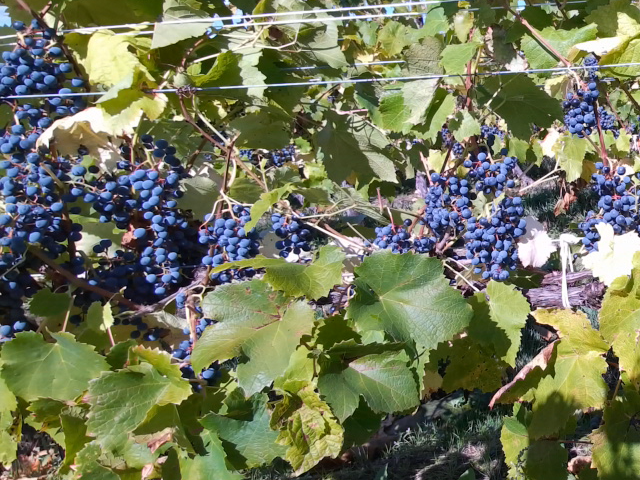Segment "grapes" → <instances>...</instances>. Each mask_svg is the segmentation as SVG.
Segmentation results:
<instances>
[{
    "mask_svg": "<svg viewBox=\"0 0 640 480\" xmlns=\"http://www.w3.org/2000/svg\"><path fill=\"white\" fill-rule=\"evenodd\" d=\"M46 105L41 104L39 108H34L31 103L22 104L17 107L15 116L18 119H28L31 127H38L35 132H31L27 137L21 138L26 133V129L22 124H12L9 128L10 134H6V129L2 128L0 132V152L11 154L10 160L0 162V169L6 170V175L0 178V191H3L5 202V211L8 214L0 216V246L10 247L14 253H5L0 259V337H11L15 332L32 331L37 332L39 326L29 322L25 316V310L22 306L21 298L23 295L30 299L42 286L28 273H20L19 275L8 269L16 266L26 251V242H40L49 251L47 256L53 260L58 258V254H63L66 247L63 244L67 237L72 242H79L82 234L79 233L83 229L80 223H72V232L68 230V223L62 221L60 215L64 210V204L76 202L79 197L83 203H92V207L100 215L99 222L106 224L112 219L115 220L118 230L128 228L130 215L127 212H116L115 202L111 201L113 194L122 195L118 199L119 205H124L127 210L137 209L144 211L142 218L150 220V229L157 236L152 242V246L157 248L154 250L151 246H145L139 253V259L136 264L120 265L110 270H105L103 265L95 268L97 277L90 278L87 282L96 284L109 291L119 292L127 285L124 290V296L138 305H150L163 297L168 296V292L163 285L179 284L182 281L180 272L181 264L177 260L179 257V249H191L193 242L189 239H183L185 233L187 236L196 234V229L189 226V222L181 217H176L173 210L166 208H175L178 205L176 200H164L160 204V195L167 189H175L179 180L191 179L192 175L185 172V167L180 165V160L173 154L176 153L175 147H167L168 142L165 139L152 143L154 137L151 134H143L141 141L146 149L153 151L156 158H162L171 168V173L166 176L163 183L155 181L160 176L157 169L138 168L133 174L125 175H107L106 183L103 181L85 180L76 178L75 185L70 188V193L60 196L56 191L55 179L49 172L43 169L40 164L41 155L30 152V148L36 147V141L43 136L42 129H48L54 123L50 117H42V112ZM25 176L21 179L22 183H17L18 176ZM136 191L137 200L131 199L130 187ZM36 196L37 204L49 205L48 209L42 206L32 204H19L18 202L27 201L29 198ZM160 204L161 214H154L153 208ZM11 213H17L20 217L15 221V227L4 226L13 222ZM169 226L176 227L172 237H168ZM168 259V274H161L163 269L155 267L163 265ZM146 272L144 276L132 278L128 283V279L122 276L134 272Z\"/></svg>",
    "mask_w": 640,
    "mask_h": 480,
    "instance_id": "01657485",
    "label": "grapes"
},
{
    "mask_svg": "<svg viewBox=\"0 0 640 480\" xmlns=\"http://www.w3.org/2000/svg\"><path fill=\"white\" fill-rule=\"evenodd\" d=\"M448 192L455 196H461L454 201V205L460 211V215L456 210L448 211L443 208V204L448 203L451 200V196L444 192L442 185L431 186L429 188V195L424 199V203L427 206L426 213L419 220L421 225L427 226L433 231L435 236H423L421 239L415 238L413 243L409 239L411 234L405 229L398 228L396 233L398 235L391 234L393 227L387 225L384 227H376L374 229V235L376 239H368L363 241L365 247H371V245L377 246L379 249L391 248L393 253L403 254L407 251L414 250L415 252L422 253L428 252L432 248V244L436 245L439 240H442L450 227H456L458 231H463L466 221V232L463 234V238L466 240L464 247L466 248L465 255L470 261L472 266L485 264V271L481 267H476L474 272L480 274L482 279H498L499 281H506L509 278L510 272L507 269L500 268L505 264H508V268L511 271H515L518 268V264L515 262L518 259L519 250L514 248L511 255H508V251L513 245V239L527 234L526 221L518 219L524 215V208L522 207L521 197H504L500 200V208L490 220L481 217L478 220V224L482 229H478L476 224L477 219L471 216V211L467 207L470 203V199L467 197L470 187L469 181L465 178L460 180L457 177H450L448 179Z\"/></svg>",
    "mask_w": 640,
    "mask_h": 480,
    "instance_id": "b958b902",
    "label": "grapes"
},
{
    "mask_svg": "<svg viewBox=\"0 0 640 480\" xmlns=\"http://www.w3.org/2000/svg\"><path fill=\"white\" fill-rule=\"evenodd\" d=\"M594 168L601 170L602 174L593 173L591 175L596 184L590 187V191L597 193L600 197L598 208L603 212V217L594 219L596 212L589 210L584 222L577 224V229L585 234L582 237V244L590 253L598 251V241L600 240V234L591 231L592 225L603 222L610 223L616 235L635 230L636 235L640 237V207L636 209V212L633 210L635 198L626 191L627 185L631 183V178L624 176L622 182H619L618 176H623L626 173V168L624 166L618 167L616 169L618 176H614L611 181H606L604 176L610 173V168L607 165H604L603 162H596Z\"/></svg>",
    "mask_w": 640,
    "mask_h": 480,
    "instance_id": "0513c4c2",
    "label": "grapes"
},
{
    "mask_svg": "<svg viewBox=\"0 0 640 480\" xmlns=\"http://www.w3.org/2000/svg\"><path fill=\"white\" fill-rule=\"evenodd\" d=\"M0 63V95L25 96L44 93L76 92L86 80L74 77L71 87H64L65 74L74 70L71 63H45L41 58L28 55L26 49L3 51Z\"/></svg>",
    "mask_w": 640,
    "mask_h": 480,
    "instance_id": "84f90ec7",
    "label": "grapes"
},
{
    "mask_svg": "<svg viewBox=\"0 0 640 480\" xmlns=\"http://www.w3.org/2000/svg\"><path fill=\"white\" fill-rule=\"evenodd\" d=\"M234 214H238L240 220H233L231 217H212L208 212L203 217V221L211 218L207 230L199 228L197 230L198 243L207 245L214 243L218 247H223L231 261H240L248 257L254 258L259 255V233L254 227H250L248 233L244 229L245 224L251 220L250 208L243 205L234 204L232 208Z\"/></svg>",
    "mask_w": 640,
    "mask_h": 480,
    "instance_id": "f8a65327",
    "label": "grapes"
},
{
    "mask_svg": "<svg viewBox=\"0 0 640 480\" xmlns=\"http://www.w3.org/2000/svg\"><path fill=\"white\" fill-rule=\"evenodd\" d=\"M488 153L480 151L476 156L469 155L467 160L463 161L465 168H472L469 171L471 179L479 178L476 183V190L481 191L484 195L492 193L493 187L497 189L494 193L498 197L504 192V182L507 179L508 169H514L518 158L516 156L503 157L502 163L496 162L493 165L487 160ZM506 187L513 188L515 182L507 180Z\"/></svg>",
    "mask_w": 640,
    "mask_h": 480,
    "instance_id": "5460f4e3",
    "label": "grapes"
},
{
    "mask_svg": "<svg viewBox=\"0 0 640 480\" xmlns=\"http://www.w3.org/2000/svg\"><path fill=\"white\" fill-rule=\"evenodd\" d=\"M291 219L290 224L285 225V216L281 213L271 214L273 223L270 224V228L274 230V235L278 239H283L274 242V248L281 250L279 256L282 258H288L291 251L295 255H300L301 250L309 251L312 240L324 236L322 231L301 223L295 214L291 215Z\"/></svg>",
    "mask_w": 640,
    "mask_h": 480,
    "instance_id": "83cd7487",
    "label": "grapes"
},
{
    "mask_svg": "<svg viewBox=\"0 0 640 480\" xmlns=\"http://www.w3.org/2000/svg\"><path fill=\"white\" fill-rule=\"evenodd\" d=\"M587 89H578L577 95L583 97V101L579 99H573L574 93L567 92L562 105L566 108L573 106L575 109L568 110L566 116L569 118V131L571 134H577L579 138H583L585 135L592 134V128L595 126V120L593 119L592 102L597 100L599 96V90L597 89V83L595 81H589L587 83Z\"/></svg>",
    "mask_w": 640,
    "mask_h": 480,
    "instance_id": "e5b3c951",
    "label": "grapes"
},
{
    "mask_svg": "<svg viewBox=\"0 0 640 480\" xmlns=\"http://www.w3.org/2000/svg\"><path fill=\"white\" fill-rule=\"evenodd\" d=\"M46 102L51 105L50 112L58 115L78 114L86 108L83 97L47 98Z\"/></svg>",
    "mask_w": 640,
    "mask_h": 480,
    "instance_id": "2adb6a1f",
    "label": "grapes"
},
{
    "mask_svg": "<svg viewBox=\"0 0 640 480\" xmlns=\"http://www.w3.org/2000/svg\"><path fill=\"white\" fill-rule=\"evenodd\" d=\"M57 162L58 163H54L45 160L44 165L48 167L53 173H55L56 178L62 182L71 181V177L69 175H65V173H70L72 171V175L74 177H83L87 173L86 167L75 166L72 168L71 163L66 160L64 156H58Z\"/></svg>",
    "mask_w": 640,
    "mask_h": 480,
    "instance_id": "ef6de9ee",
    "label": "grapes"
},
{
    "mask_svg": "<svg viewBox=\"0 0 640 480\" xmlns=\"http://www.w3.org/2000/svg\"><path fill=\"white\" fill-rule=\"evenodd\" d=\"M137 326L136 329L132 330L129 334V338L130 339H138L141 335L140 331H146V333L142 334V338L144 342H155L158 341L161 336L163 335V329L161 327H156L155 331H152L151 328H148V325L146 323H142V317L141 316H136L134 318H132L131 320L129 319H123L122 320V325L123 326Z\"/></svg>",
    "mask_w": 640,
    "mask_h": 480,
    "instance_id": "1ff8f66d",
    "label": "grapes"
},
{
    "mask_svg": "<svg viewBox=\"0 0 640 480\" xmlns=\"http://www.w3.org/2000/svg\"><path fill=\"white\" fill-rule=\"evenodd\" d=\"M74 297L73 305L75 308H82V315L88 314V309L94 302H99L101 300V296L98 293H95L91 290L83 289L79 286H76L75 289L71 292Z\"/></svg>",
    "mask_w": 640,
    "mask_h": 480,
    "instance_id": "54f908b8",
    "label": "grapes"
},
{
    "mask_svg": "<svg viewBox=\"0 0 640 480\" xmlns=\"http://www.w3.org/2000/svg\"><path fill=\"white\" fill-rule=\"evenodd\" d=\"M255 274H256V270L253 268L243 267V268H240L239 270L235 268H230L229 271L224 270L221 272H216L215 274H211L210 278L218 279L219 284L224 285L225 283L230 284L232 278L236 279L237 281H242L244 276L253 277Z\"/></svg>",
    "mask_w": 640,
    "mask_h": 480,
    "instance_id": "91a60905",
    "label": "grapes"
},
{
    "mask_svg": "<svg viewBox=\"0 0 640 480\" xmlns=\"http://www.w3.org/2000/svg\"><path fill=\"white\" fill-rule=\"evenodd\" d=\"M53 35V30L51 28H47L43 31V35L41 39H35L33 37H27L24 41L25 44L30 48L29 53L35 57H42L45 54V43L46 40H50Z\"/></svg>",
    "mask_w": 640,
    "mask_h": 480,
    "instance_id": "dcf779d0",
    "label": "grapes"
},
{
    "mask_svg": "<svg viewBox=\"0 0 640 480\" xmlns=\"http://www.w3.org/2000/svg\"><path fill=\"white\" fill-rule=\"evenodd\" d=\"M200 264L202 266H206L208 264H211L212 267H216L217 265H223L224 264V254L223 253H219V251L217 249H214V255L210 256L209 255V248H206L204 251V256L200 258Z\"/></svg>",
    "mask_w": 640,
    "mask_h": 480,
    "instance_id": "802abce8",
    "label": "grapes"
},
{
    "mask_svg": "<svg viewBox=\"0 0 640 480\" xmlns=\"http://www.w3.org/2000/svg\"><path fill=\"white\" fill-rule=\"evenodd\" d=\"M193 345V340H183L180 342L178 349H174L171 352L172 357H176L180 360H188L190 358V348Z\"/></svg>",
    "mask_w": 640,
    "mask_h": 480,
    "instance_id": "012428b0",
    "label": "grapes"
},
{
    "mask_svg": "<svg viewBox=\"0 0 640 480\" xmlns=\"http://www.w3.org/2000/svg\"><path fill=\"white\" fill-rule=\"evenodd\" d=\"M120 155L125 159L116 164V168L119 170H127L130 168L129 161L131 160V149L128 146L120 147Z\"/></svg>",
    "mask_w": 640,
    "mask_h": 480,
    "instance_id": "9fbda902",
    "label": "grapes"
},
{
    "mask_svg": "<svg viewBox=\"0 0 640 480\" xmlns=\"http://www.w3.org/2000/svg\"><path fill=\"white\" fill-rule=\"evenodd\" d=\"M218 323L217 319L212 318H201L200 322L195 325L196 333L198 335H202L207 327L216 325Z\"/></svg>",
    "mask_w": 640,
    "mask_h": 480,
    "instance_id": "34c12dc5",
    "label": "grapes"
},
{
    "mask_svg": "<svg viewBox=\"0 0 640 480\" xmlns=\"http://www.w3.org/2000/svg\"><path fill=\"white\" fill-rule=\"evenodd\" d=\"M72 264H74V268H72V272L75 275H81L85 272V267L83 266L84 264L83 257H74V259H72Z\"/></svg>",
    "mask_w": 640,
    "mask_h": 480,
    "instance_id": "4a4d1313",
    "label": "grapes"
},
{
    "mask_svg": "<svg viewBox=\"0 0 640 480\" xmlns=\"http://www.w3.org/2000/svg\"><path fill=\"white\" fill-rule=\"evenodd\" d=\"M89 154V148L84 146L83 144H79L77 147V159L76 162L80 163L84 160V156Z\"/></svg>",
    "mask_w": 640,
    "mask_h": 480,
    "instance_id": "23402543",
    "label": "grapes"
},
{
    "mask_svg": "<svg viewBox=\"0 0 640 480\" xmlns=\"http://www.w3.org/2000/svg\"><path fill=\"white\" fill-rule=\"evenodd\" d=\"M494 142H495V136L493 134H490L487 137V145L490 147L491 157H493V155H494V150H493V148H491V146L494 144Z\"/></svg>",
    "mask_w": 640,
    "mask_h": 480,
    "instance_id": "62ce99fe",
    "label": "grapes"
}]
</instances>
